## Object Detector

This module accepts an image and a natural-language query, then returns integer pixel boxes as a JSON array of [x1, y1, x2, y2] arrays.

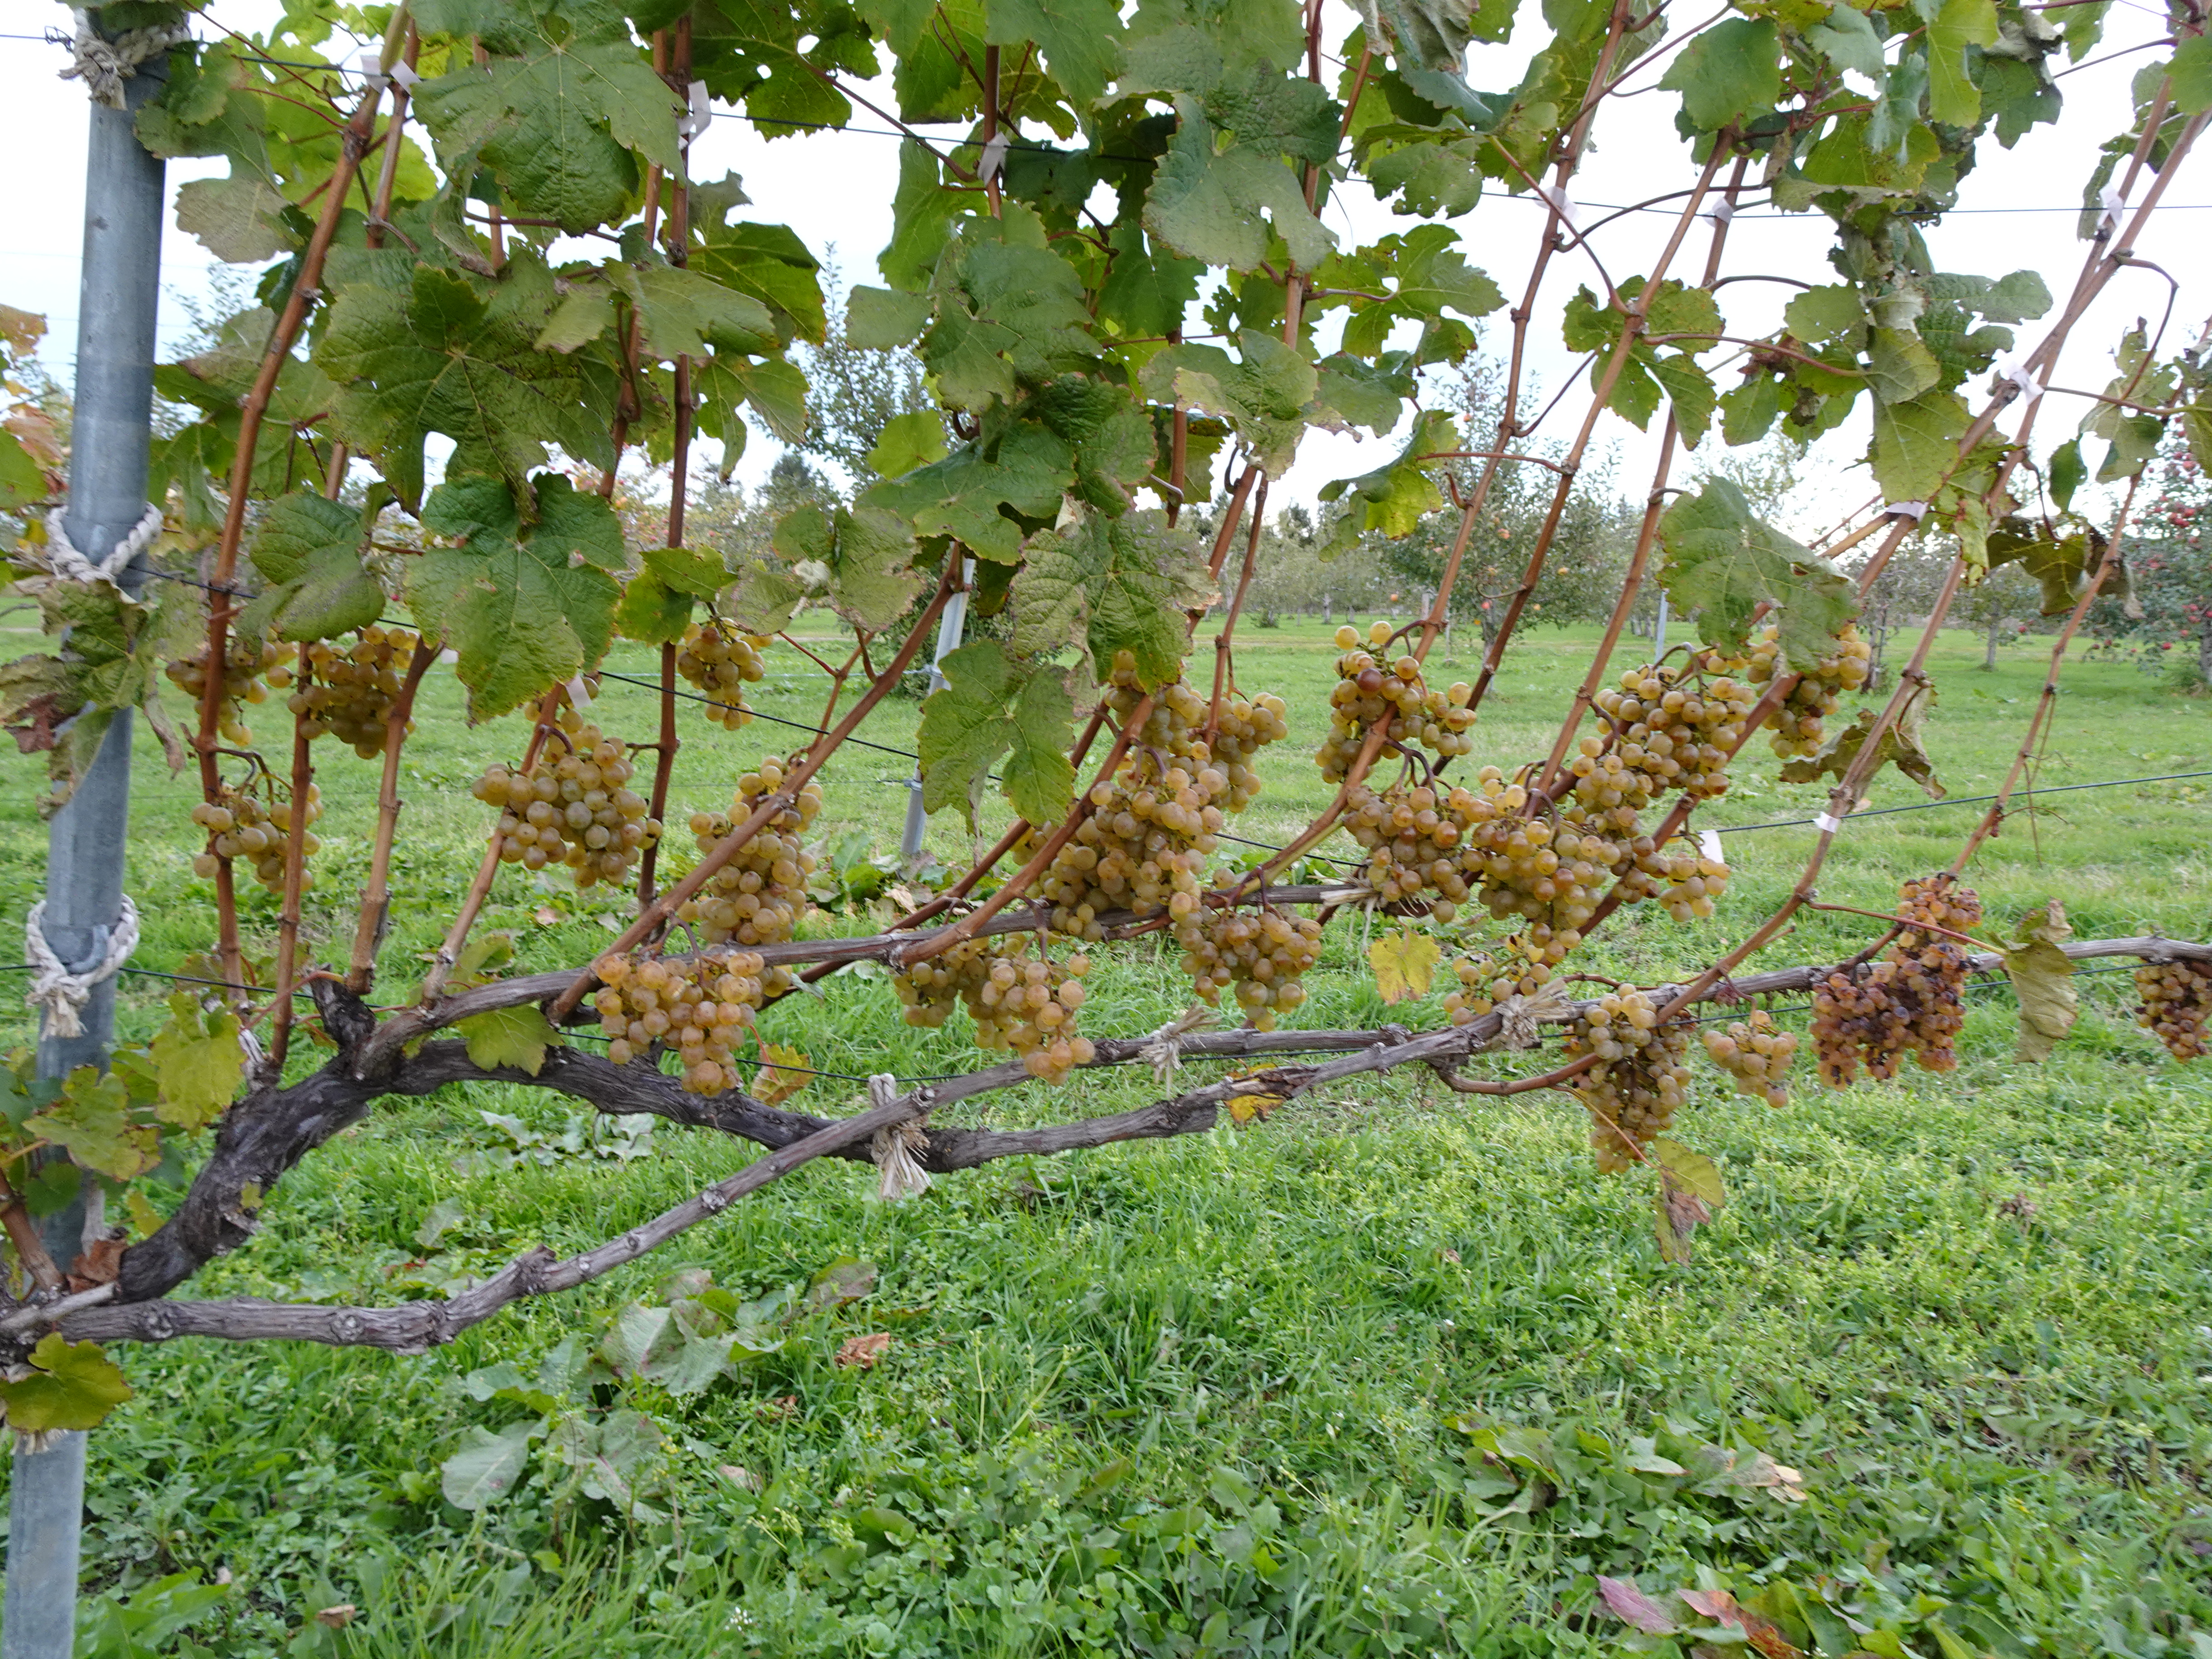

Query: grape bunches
[[522, 656, 609, 734], [1759, 611, 1878, 761], [160, 623, 300, 749], [1337, 784, 1471, 927], [1221, 901, 1324, 1038], [676, 618, 776, 735], [888, 932, 990, 1032], [1700, 1009, 1801, 1112], [1857, 956, 1915, 1084], [958, 934, 1101, 1094], [661, 948, 769, 1103], [1090, 780, 1223, 929], [1560, 1012, 1700, 1178], [677, 752, 823, 1001], [1706, 632, 1779, 684], [1439, 922, 1584, 1030], [587, 952, 672, 1069], [1446, 761, 1576, 923], [1664, 848, 1735, 930], [1591, 661, 1758, 802], [1315, 618, 1429, 786], [1807, 970, 1869, 1096], [1581, 979, 1659, 1067], [1886, 866, 1988, 1076], [1003, 797, 1107, 945], [542, 727, 664, 889], [1572, 730, 1681, 909], [1496, 837, 1623, 969], [187, 777, 326, 899], [1170, 867, 1262, 1014], [1102, 641, 1218, 802], [265, 624, 424, 761], [1203, 690, 1293, 819], [470, 759, 569, 873], [2128, 958, 2212, 1070], [1421, 677, 1485, 762]]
